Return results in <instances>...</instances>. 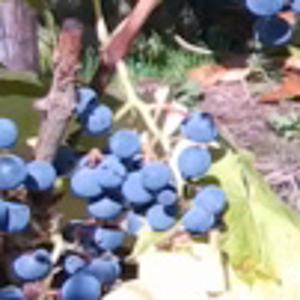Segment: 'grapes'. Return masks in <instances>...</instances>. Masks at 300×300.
Returning a JSON list of instances; mask_svg holds the SVG:
<instances>
[{
	"mask_svg": "<svg viewBox=\"0 0 300 300\" xmlns=\"http://www.w3.org/2000/svg\"><path fill=\"white\" fill-rule=\"evenodd\" d=\"M80 241L93 258L78 254L66 256L61 263L64 281L60 285L61 300H99L103 288L120 280L121 257L116 252L124 244V233L116 225L85 226Z\"/></svg>",
	"mask_w": 300,
	"mask_h": 300,
	"instance_id": "b958b902",
	"label": "grapes"
},
{
	"mask_svg": "<svg viewBox=\"0 0 300 300\" xmlns=\"http://www.w3.org/2000/svg\"><path fill=\"white\" fill-rule=\"evenodd\" d=\"M21 139L19 125L11 117L0 119V146L3 148H12Z\"/></svg>",
	"mask_w": 300,
	"mask_h": 300,
	"instance_id": "5460f4e3",
	"label": "grapes"
},
{
	"mask_svg": "<svg viewBox=\"0 0 300 300\" xmlns=\"http://www.w3.org/2000/svg\"><path fill=\"white\" fill-rule=\"evenodd\" d=\"M32 223V211L22 199L0 195V235H22Z\"/></svg>",
	"mask_w": 300,
	"mask_h": 300,
	"instance_id": "f8a65327",
	"label": "grapes"
},
{
	"mask_svg": "<svg viewBox=\"0 0 300 300\" xmlns=\"http://www.w3.org/2000/svg\"><path fill=\"white\" fill-rule=\"evenodd\" d=\"M0 300H28V295L16 286L7 284L0 287Z\"/></svg>",
	"mask_w": 300,
	"mask_h": 300,
	"instance_id": "83cd7487",
	"label": "grapes"
},
{
	"mask_svg": "<svg viewBox=\"0 0 300 300\" xmlns=\"http://www.w3.org/2000/svg\"><path fill=\"white\" fill-rule=\"evenodd\" d=\"M73 119L84 133L104 136L106 158L96 163L60 146L56 159L46 163L15 153H0V190L31 193L54 188L69 176L71 196L87 200V212L98 221L117 219L127 211L125 231L137 234L148 224L163 233L176 223L187 234L208 235L221 222L227 194L217 186L201 188L200 177L213 166L212 141L218 138V118L195 112L181 130L152 136L133 129L110 131L113 113L89 86L76 89Z\"/></svg>",
	"mask_w": 300,
	"mask_h": 300,
	"instance_id": "01657485",
	"label": "grapes"
},
{
	"mask_svg": "<svg viewBox=\"0 0 300 300\" xmlns=\"http://www.w3.org/2000/svg\"><path fill=\"white\" fill-rule=\"evenodd\" d=\"M53 268L50 250L38 246L19 251L10 262L12 277L19 282H34L44 278Z\"/></svg>",
	"mask_w": 300,
	"mask_h": 300,
	"instance_id": "84f90ec7",
	"label": "grapes"
},
{
	"mask_svg": "<svg viewBox=\"0 0 300 300\" xmlns=\"http://www.w3.org/2000/svg\"><path fill=\"white\" fill-rule=\"evenodd\" d=\"M284 10L300 15V0H245L243 12L255 19L251 34L265 50L284 47L293 37V29L283 17Z\"/></svg>",
	"mask_w": 300,
	"mask_h": 300,
	"instance_id": "0513c4c2",
	"label": "grapes"
}]
</instances>
